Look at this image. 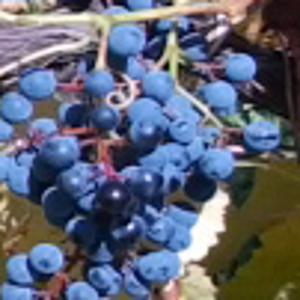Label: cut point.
Instances as JSON below:
<instances>
[{
    "instance_id": "1",
    "label": "cut point",
    "mask_w": 300,
    "mask_h": 300,
    "mask_svg": "<svg viewBox=\"0 0 300 300\" xmlns=\"http://www.w3.org/2000/svg\"><path fill=\"white\" fill-rule=\"evenodd\" d=\"M181 17L182 14L180 12L177 13L169 12L167 14V19L169 21V26H170L169 34L167 36V39L165 40L163 54L160 57L159 61L157 62V66L159 68H162L168 60L169 70L172 73H176L179 68V63H178L179 53L177 52L179 35L176 33V29H177L176 22Z\"/></svg>"
},
{
    "instance_id": "2",
    "label": "cut point",
    "mask_w": 300,
    "mask_h": 300,
    "mask_svg": "<svg viewBox=\"0 0 300 300\" xmlns=\"http://www.w3.org/2000/svg\"><path fill=\"white\" fill-rule=\"evenodd\" d=\"M112 27V23L107 21L103 28L100 40V46L97 50V60L95 62V66L97 68H105L107 66L108 57H107V49H108V38H109V31Z\"/></svg>"
}]
</instances>
